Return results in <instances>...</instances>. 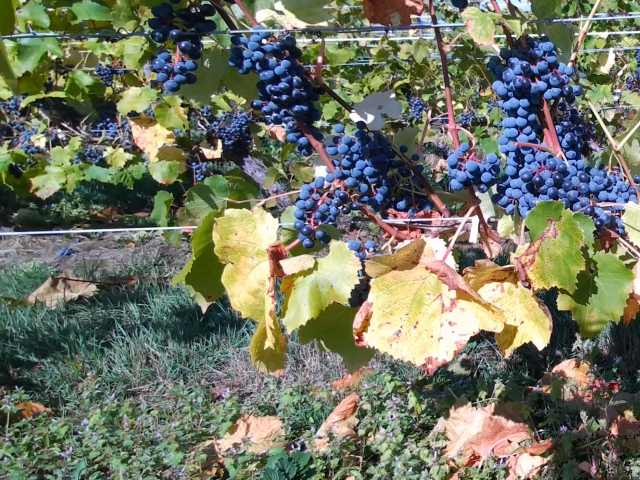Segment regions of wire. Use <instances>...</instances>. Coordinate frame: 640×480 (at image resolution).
<instances>
[{
	"instance_id": "d2f4af69",
	"label": "wire",
	"mask_w": 640,
	"mask_h": 480,
	"mask_svg": "<svg viewBox=\"0 0 640 480\" xmlns=\"http://www.w3.org/2000/svg\"><path fill=\"white\" fill-rule=\"evenodd\" d=\"M465 23H431L423 22L411 25H379V26H341L335 28H291L269 27L259 29H227L222 31H209V36H224L229 34H261L271 32L293 33H338L343 31H381V30H414L421 28H465Z\"/></svg>"
},
{
	"instance_id": "a73af890",
	"label": "wire",
	"mask_w": 640,
	"mask_h": 480,
	"mask_svg": "<svg viewBox=\"0 0 640 480\" xmlns=\"http://www.w3.org/2000/svg\"><path fill=\"white\" fill-rule=\"evenodd\" d=\"M198 225L177 227V226H146V227H112V228H81L72 230H48V231H25V230H3L0 236L22 235V236H51V235H74L83 233H130V232H176L198 230Z\"/></svg>"
},
{
	"instance_id": "4f2155b8",
	"label": "wire",
	"mask_w": 640,
	"mask_h": 480,
	"mask_svg": "<svg viewBox=\"0 0 640 480\" xmlns=\"http://www.w3.org/2000/svg\"><path fill=\"white\" fill-rule=\"evenodd\" d=\"M148 31H131L121 33H93L83 35H64L60 32H35V33H22V34H1V39H24V38H37V37H57L61 40H85L96 38H123L133 36H148Z\"/></svg>"
},
{
	"instance_id": "f0478fcc",
	"label": "wire",
	"mask_w": 640,
	"mask_h": 480,
	"mask_svg": "<svg viewBox=\"0 0 640 480\" xmlns=\"http://www.w3.org/2000/svg\"><path fill=\"white\" fill-rule=\"evenodd\" d=\"M637 19H640V14L606 16V17L547 18V19H541V20H530L529 24L543 25V24H549V23L608 22V21L637 20Z\"/></svg>"
}]
</instances>
